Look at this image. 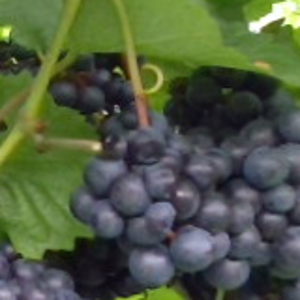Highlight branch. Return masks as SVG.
<instances>
[{
	"label": "branch",
	"mask_w": 300,
	"mask_h": 300,
	"mask_svg": "<svg viewBox=\"0 0 300 300\" xmlns=\"http://www.w3.org/2000/svg\"><path fill=\"white\" fill-rule=\"evenodd\" d=\"M116 6L120 13L119 18L121 19L122 30H123L124 39L127 46V51H128V63H129V69L132 74L135 101L138 106L139 124L141 126H144L149 123V120L147 119L146 103H145V98L143 93V87L139 78V65L137 62L134 43L131 36L130 27L128 24V15H127L126 8L121 1H118L116 3Z\"/></svg>",
	"instance_id": "branch-2"
},
{
	"label": "branch",
	"mask_w": 300,
	"mask_h": 300,
	"mask_svg": "<svg viewBox=\"0 0 300 300\" xmlns=\"http://www.w3.org/2000/svg\"><path fill=\"white\" fill-rule=\"evenodd\" d=\"M82 9L81 0H64L63 11L59 21V28L54 36L52 44L48 50V55L42 65L39 76L36 79L32 93L26 103L20 118L14 123L6 138L0 144V166H3L10 158L11 154L25 135L28 129L33 138L39 143L49 144L52 147L69 149H82L88 152H99L102 144L93 140H73L60 137H45L39 134L34 115L45 92L46 86L51 78L52 72L58 61L69 31L73 26L76 14Z\"/></svg>",
	"instance_id": "branch-1"
}]
</instances>
